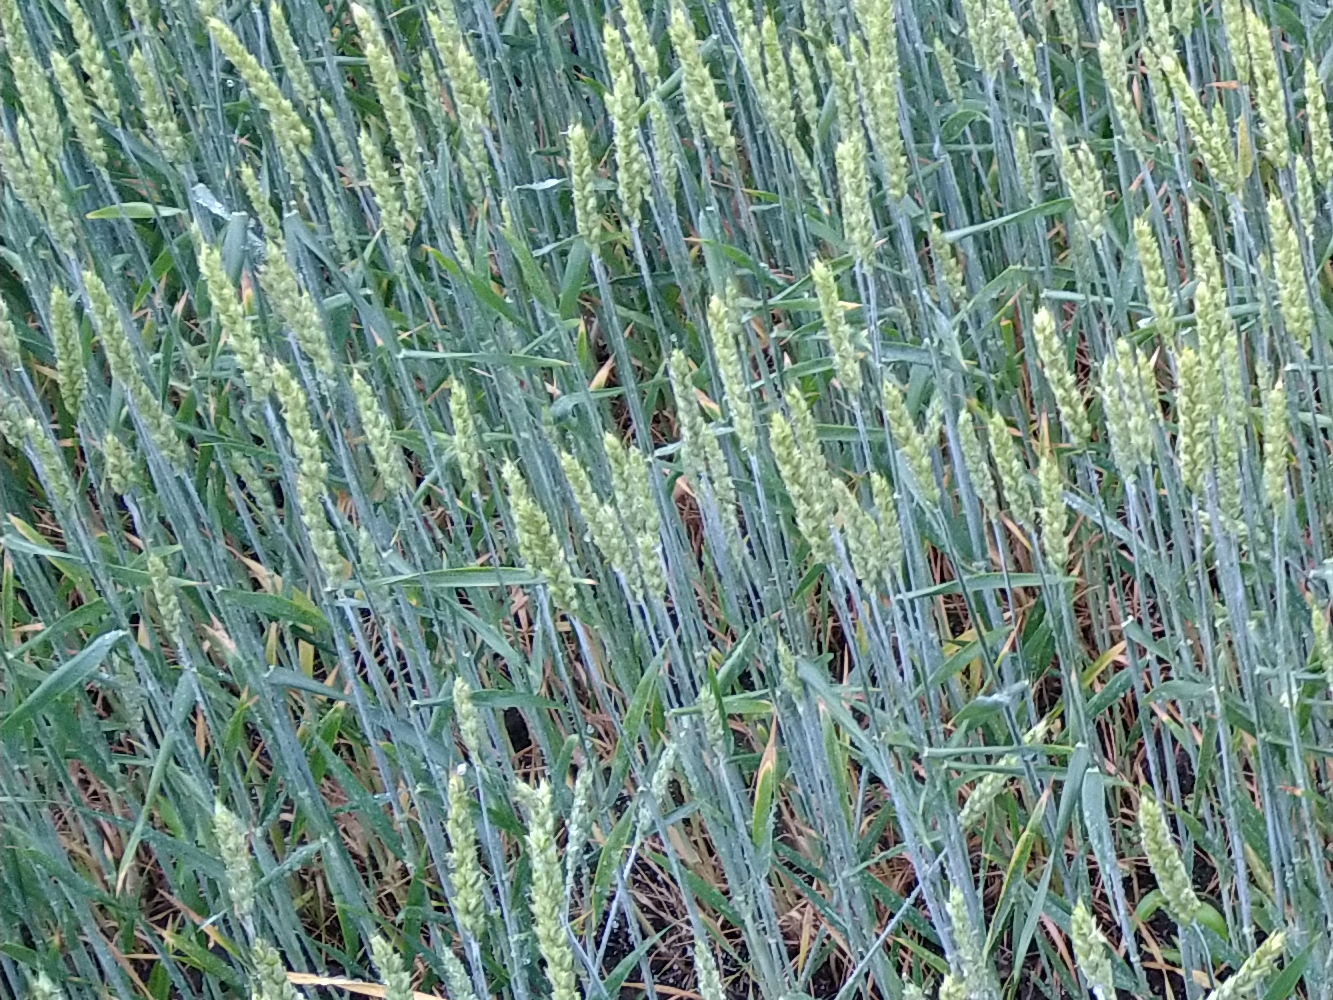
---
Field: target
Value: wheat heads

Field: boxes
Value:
[319,174,349,248]
[1140,790,1194,917]
[1139,351,1166,424]
[616,79,641,213]
[665,353,713,495]
[697,685,731,753]
[66,0,119,112]
[275,124,310,194]
[956,411,997,512]
[629,446,662,532]
[926,399,944,440]
[1114,340,1148,452]
[651,92,682,185]
[445,769,485,933]
[419,50,452,129]
[429,12,489,113]
[352,3,423,173]
[215,798,261,920]
[1196,284,1227,413]
[1070,898,1123,1000]
[196,244,263,383]
[962,727,1038,829]
[813,264,859,391]
[1081,145,1108,207]
[359,129,408,255]
[637,533,666,596]
[1052,0,1080,54]
[566,127,597,234]
[934,35,963,108]
[720,0,755,46]
[762,16,795,131]
[1188,207,1227,314]
[988,417,1034,528]
[297,276,332,377]
[986,0,1005,72]
[128,46,177,158]
[357,526,394,626]
[1312,611,1333,684]
[854,507,886,566]
[459,151,484,199]
[769,417,829,566]
[0,398,70,503]
[1212,100,1236,159]
[520,499,574,608]
[789,44,818,128]
[50,55,111,166]
[874,0,898,87]
[1098,3,1127,81]
[518,778,571,1000]
[1245,7,1290,167]
[1223,322,1250,422]
[1222,0,1251,77]
[127,382,183,453]
[931,227,965,297]
[1034,451,1066,563]
[566,770,590,872]
[598,510,636,579]
[103,438,143,486]
[356,371,406,495]
[273,361,329,477]
[83,270,139,385]
[270,1,319,110]
[945,886,989,992]
[871,472,900,560]
[837,143,853,241]
[500,457,535,540]
[15,119,77,244]
[1193,931,1286,1000]
[709,297,756,447]
[1214,411,1245,516]
[1174,358,1208,489]
[1030,0,1050,29]
[147,555,187,646]
[608,0,662,83]
[606,434,643,531]
[786,387,837,515]
[374,936,425,1000]
[254,944,338,1000]
[450,676,486,748]
[741,29,778,128]
[1101,43,1144,142]
[0,133,47,223]
[447,381,480,483]
[16,59,62,156]
[0,0,37,56]
[47,285,86,408]
[1143,46,1180,146]
[801,0,834,87]
[1017,131,1032,195]
[1295,155,1315,221]
[1256,359,1270,400]
[320,99,349,169]
[692,940,736,1000]
[425,0,468,47]
[240,164,281,241]
[0,302,20,362]
[458,45,494,107]
[851,39,881,146]
[702,425,738,519]
[834,481,876,573]
[557,448,605,533]
[400,166,426,209]
[438,947,492,1000]
[870,79,909,201]
[1266,194,1313,326]
[636,738,679,831]
[447,49,492,166]
[1144,0,1171,47]
[208,23,311,141]
[1051,127,1104,240]
[604,96,654,192]
[837,0,871,35]
[1265,381,1287,489]
[233,449,272,519]
[296,478,346,583]
[251,262,275,311]
[1134,217,1177,328]
[975,0,1038,89]
[886,385,941,495]
[1099,358,1131,471]
[267,237,299,331]
[1032,311,1092,446]
[791,138,828,210]
[1304,58,1333,177]
[671,11,737,159]
[849,140,877,251]
[828,49,866,149]
[956,0,984,67]
[1276,257,1311,350]
[1157,39,1240,185]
